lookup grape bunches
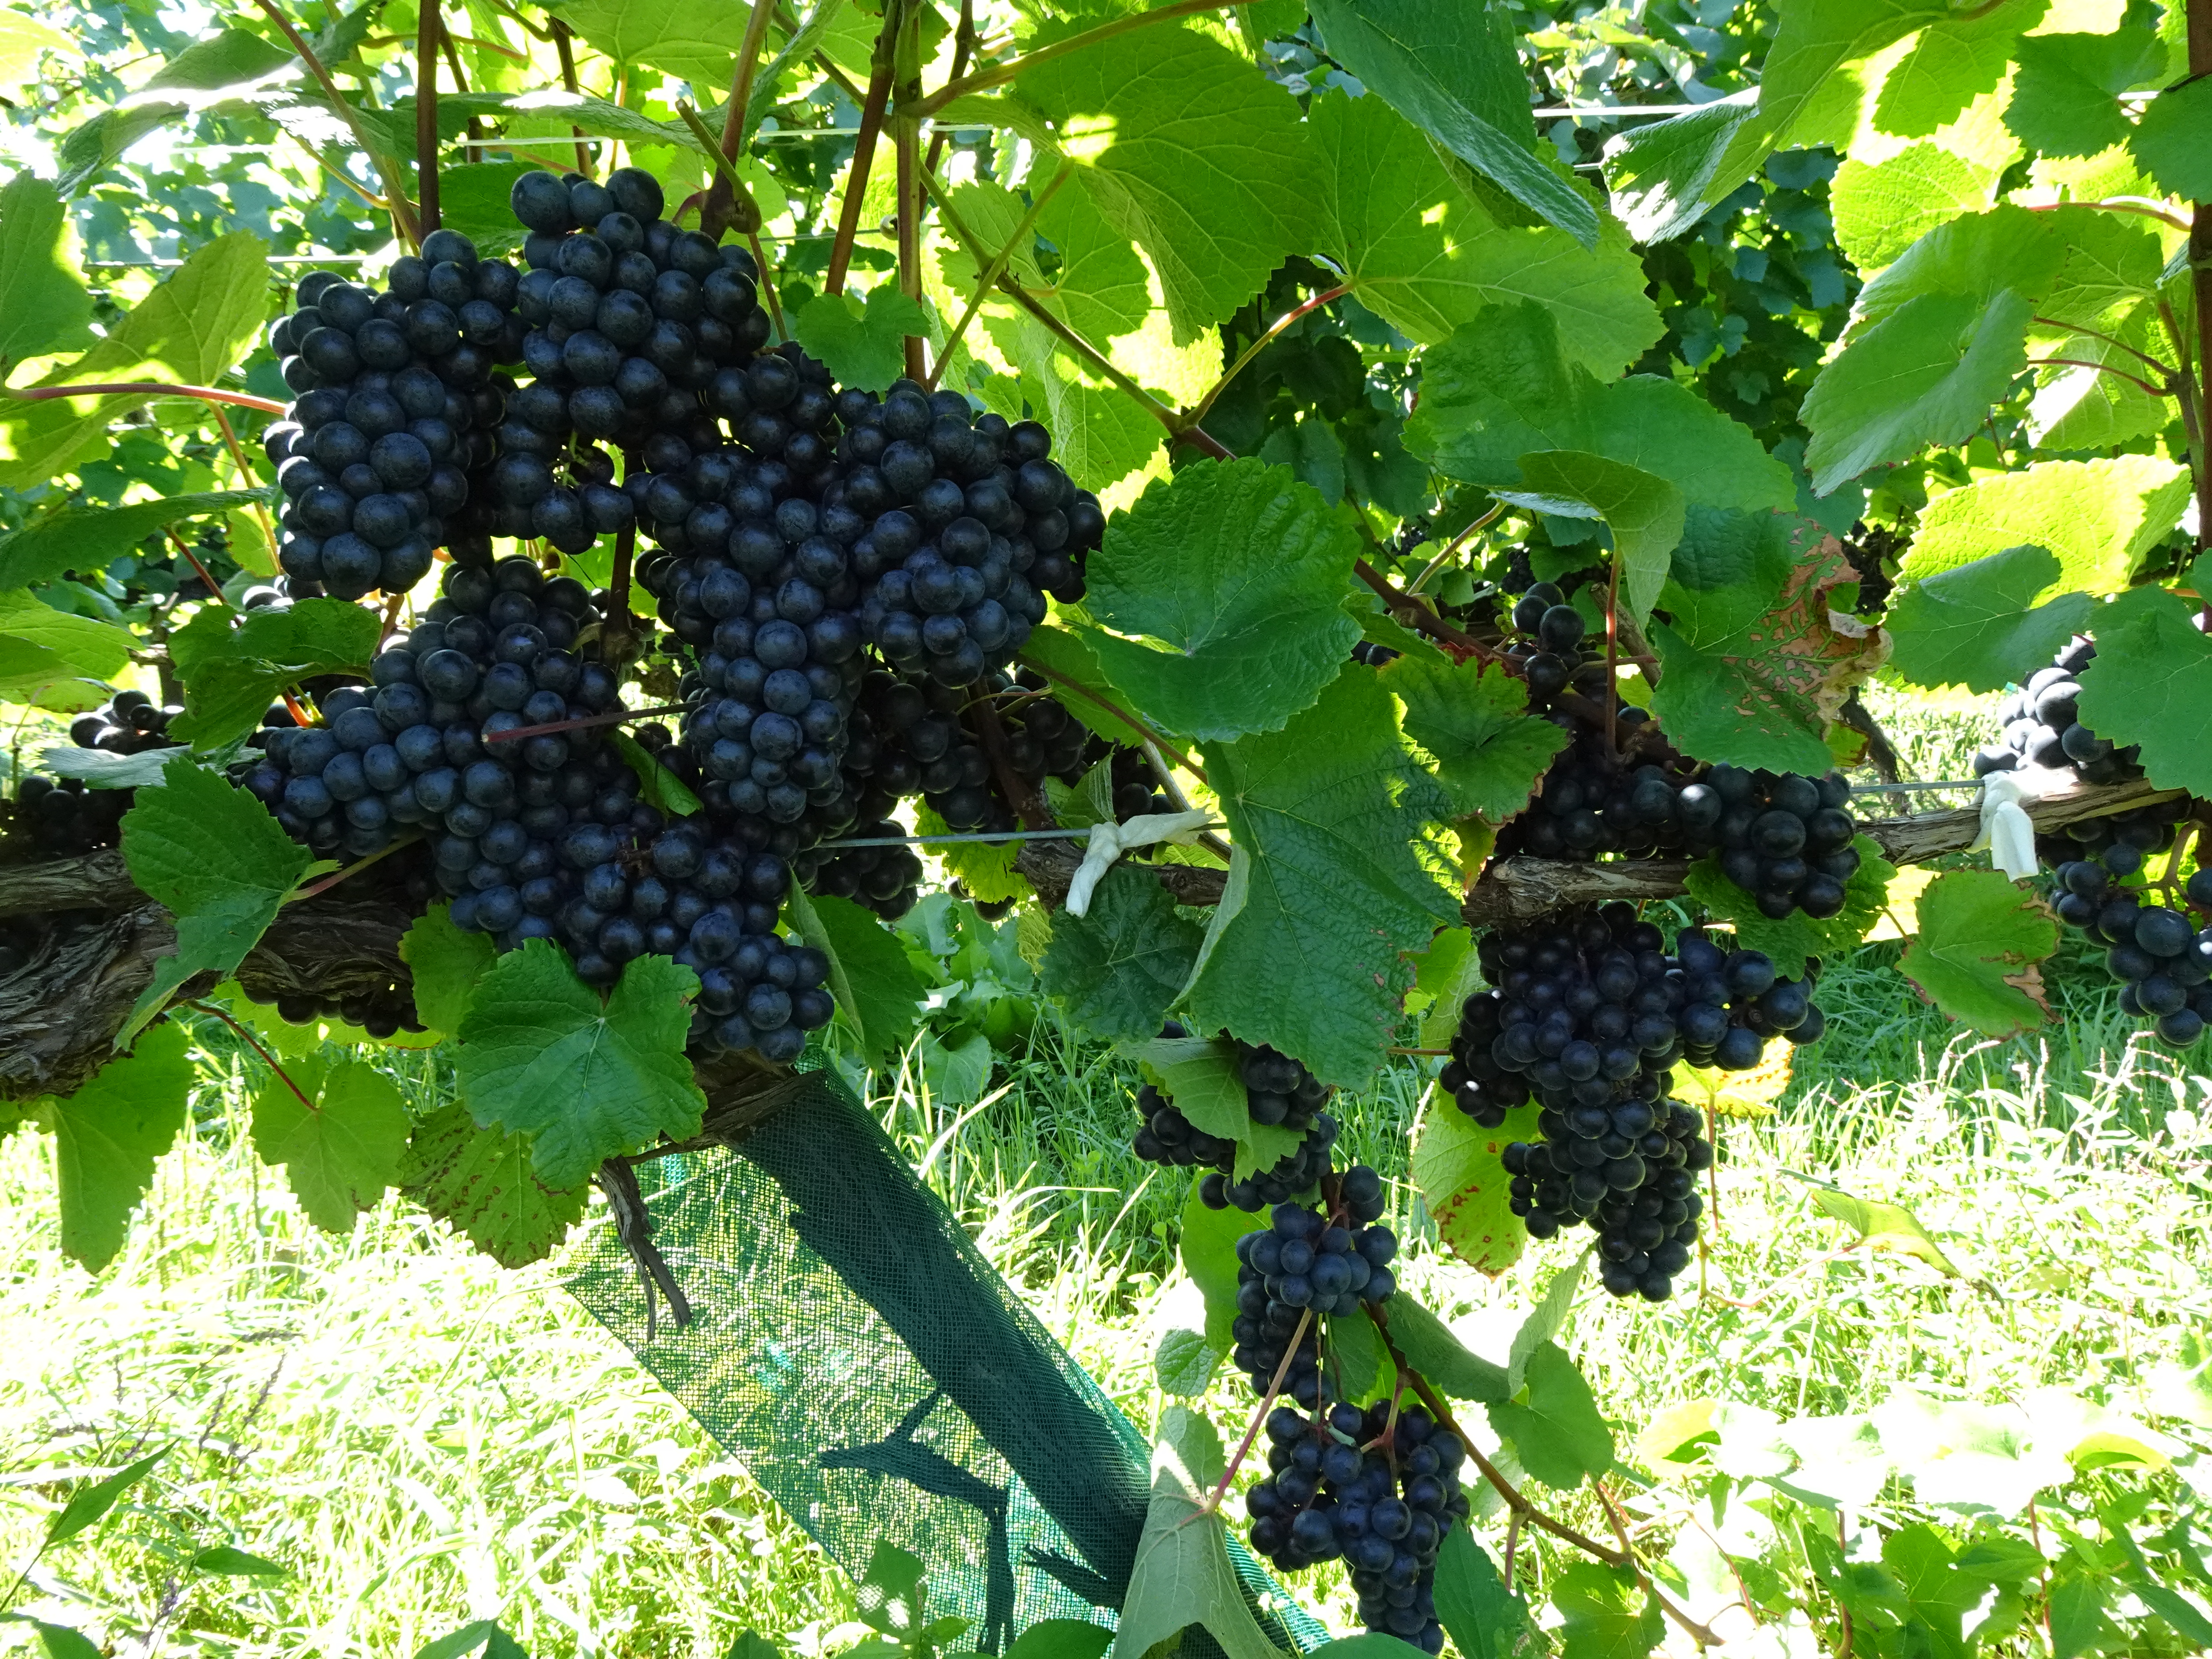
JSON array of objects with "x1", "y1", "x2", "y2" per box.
[
  {"x1": 241, "y1": 579, "x2": 326, "y2": 611},
  {"x1": 949, "y1": 879, "x2": 1019, "y2": 923},
  {"x1": 860, "y1": 657, "x2": 1089, "y2": 845},
  {"x1": 1838, "y1": 532, "x2": 1893, "y2": 617},
  {"x1": 560, "y1": 723, "x2": 835, "y2": 1067},
  {"x1": 623, "y1": 354, "x2": 897, "y2": 824},
  {"x1": 1232, "y1": 1231, "x2": 1335, "y2": 1412},
  {"x1": 435, "y1": 734, "x2": 637, "y2": 952},
  {"x1": 229, "y1": 555, "x2": 647, "y2": 896},
  {"x1": 337, "y1": 993, "x2": 428, "y2": 1039},
  {"x1": 1589, "y1": 1097, "x2": 1714, "y2": 1305},
  {"x1": 1089, "y1": 731, "x2": 1182, "y2": 860},
  {"x1": 2048, "y1": 845, "x2": 2212, "y2": 1049},
  {"x1": 1512, "y1": 653, "x2": 1683, "y2": 862},
  {"x1": 1437, "y1": 988, "x2": 1533, "y2": 1129},
  {"x1": 1132, "y1": 1022, "x2": 1237, "y2": 1171},
  {"x1": 1199, "y1": 1113, "x2": 1338, "y2": 1212},
  {"x1": 245, "y1": 976, "x2": 341, "y2": 1029},
  {"x1": 0, "y1": 692, "x2": 185, "y2": 869},
  {"x1": 1974, "y1": 645, "x2": 2212, "y2": 869},
  {"x1": 1221, "y1": 1028, "x2": 1332, "y2": 1131},
  {"x1": 1633, "y1": 766, "x2": 1727, "y2": 834},
  {"x1": 847, "y1": 376, "x2": 1108, "y2": 690},
  {"x1": 1499, "y1": 1140, "x2": 1582, "y2": 1240},
  {"x1": 1237, "y1": 1166, "x2": 1398, "y2": 1318},
  {"x1": 1476, "y1": 901, "x2": 1662, "y2": 1000},
  {"x1": 1350, "y1": 641, "x2": 1400, "y2": 666},
  {"x1": 1506, "y1": 580, "x2": 1585, "y2": 698},
  {"x1": 1715, "y1": 764, "x2": 1860, "y2": 918},
  {"x1": 264, "y1": 230, "x2": 527, "y2": 601},
  {"x1": 1246, "y1": 1368, "x2": 1372, "y2": 1572},
  {"x1": 1656, "y1": 927, "x2": 1826, "y2": 1071},
  {"x1": 1325, "y1": 1399, "x2": 1471, "y2": 1653},
  {"x1": 493, "y1": 168, "x2": 770, "y2": 555},
  {"x1": 1489, "y1": 951, "x2": 1692, "y2": 1218},
  {"x1": 706, "y1": 701, "x2": 924, "y2": 923}
]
